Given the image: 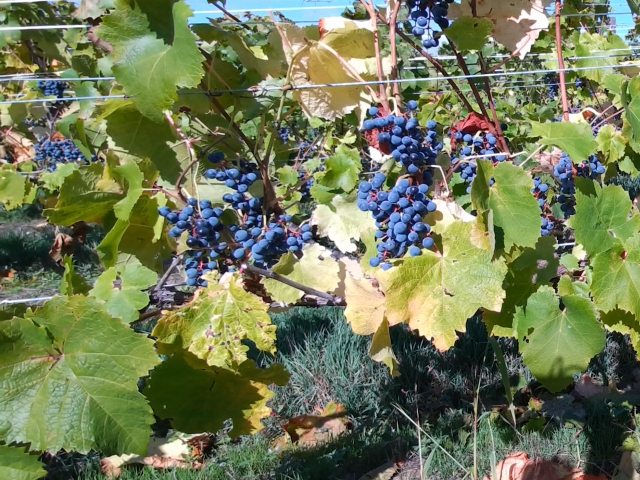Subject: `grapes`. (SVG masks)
I'll use <instances>...</instances> for the list:
<instances>
[{
	"label": "grapes",
	"mask_w": 640,
	"mask_h": 480,
	"mask_svg": "<svg viewBox=\"0 0 640 480\" xmlns=\"http://www.w3.org/2000/svg\"><path fill=\"white\" fill-rule=\"evenodd\" d=\"M468 161L476 163L475 159H468ZM470 162L458 164L455 173H459L460 178L467 180L468 182H473L476 175V166Z\"/></svg>",
	"instance_id": "grapes-9"
},
{
	"label": "grapes",
	"mask_w": 640,
	"mask_h": 480,
	"mask_svg": "<svg viewBox=\"0 0 640 480\" xmlns=\"http://www.w3.org/2000/svg\"><path fill=\"white\" fill-rule=\"evenodd\" d=\"M455 139L461 140L462 143H467L469 145L474 144L475 147L481 148L484 146V140L482 138H475L473 134H468L467 131L457 130L455 132Z\"/></svg>",
	"instance_id": "grapes-10"
},
{
	"label": "grapes",
	"mask_w": 640,
	"mask_h": 480,
	"mask_svg": "<svg viewBox=\"0 0 640 480\" xmlns=\"http://www.w3.org/2000/svg\"><path fill=\"white\" fill-rule=\"evenodd\" d=\"M198 206V200L196 198H188L186 205L181 208V213L172 212L170 207H160L158 214L165 218L170 223H175V227L169 230V236L171 238H178L183 234L185 229L191 227L189 217L194 215V208Z\"/></svg>",
	"instance_id": "grapes-7"
},
{
	"label": "grapes",
	"mask_w": 640,
	"mask_h": 480,
	"mask_svg": "<svg viewBox=\"0 0 640 480\" xmlns=\"http://www.w3.org/2000/svg\"><path fill=\"white\" fill-rule=\"evenodd\" d=\"M241 171L238 169L227 168L223 171H218L216 168H208L205 171V177L207 179H214L216 182H224L225 187H230L236 190V193H224L222 200L224 203H230V206L234 210H247V217L244 221L246 228H252L251 231L242 229L240 225H230L228 231L233 234V240L235 243H240L242 247L234 248L231 254L232 259H242L245 255V250L251 248V254L253 255V264L257 268H261L263 263L266 262L264 269L269 270L278 263L276 259L278 254L287 253L288 251L297 252L300 247L306 245V241H310L313 237L311 226L304 224L300 228L301 235H295L292 232L284 236L285 230L280 227L277 222H269L266 225L268 229L263 230L262 213H257L258 208L261 206L260 197H252L245 199V192L249 190V186H252L254 182L261 179L260 173H254L253 170L257 169L255 163H248L243 159L239 160Z\"/></svg>",
	"instance_id": "grapes-2"
},
{
	"label": "grapes",
	"mask_w": 640,
	"mask_h": 480,
	"mask_svg": "<svg viewBox=\"0 0 640 480\" xmlns=\"http://www.w3.org/2000/svg\"><path fill=\"white\" fill-rule=\"evenodd\" d=\"M590 168L592 169V173L589 174V168L587 166L576 167L577 175L582 177L583 179H597L598 175H604L607 172V169L600 161L597 160L596 155H591L589 157Z\"/></svg>",
	"instance_id": "grapes-8"
},
{
	"label": "grapes",
	"mask_w": 640,
	"mask_h": 480,
	"mask_svg": "<svg viewBox=\"0 0 640 480\" xmlns=\"http://www.w3.org/2000/svg\"><path fill=\"white\" fill-rule=\"evenodd\" d=\"M434 176V169L428 167L422 172L423 183L413 184L409 180H400L392 191H379L376 194V201H369L372 194L369 191L379 189L387 181L383 172H377L369 181H362L358 185L357 196L360 198L356 206L360 211L372 212V217L376 221L375 226L381 228L383 221L389 216L386 233L377 230L373 233L375 238H384V242L376 245L377 256L368 260L371 268L379 266L382 270L388 271L392 264L382 262L385 259V251L392 252L396 258H400L405 252L406 246H411L419 239L420 235H427L431 231L429 224L422 223V217L428 212L437 209V203L427 198L429 186L433 184L431 179ZM422 254L419 246H411L409 255L412 258Z\"/></svg>",
	"instance_id": "grapes-1"
},
{
	"label": "grapes",
	"mask_w": 640,
	"mask_h": 480,
	"mask_svg": "<svg viewBox=\"0 0 640 480\" xmlns=\"http://www.w3.org/2000/svg\"><path fill=\"white\" fill-rule=\"evenodd\" d=\"M439 33V30H432V38H427L423 41V48L430 49L432 47H437L439 45V39H441V35L435 37V34Z\"/></svg>",
	"instance_id": "grapes-12"
},
{
	"label": "grapes",
	"mask_w": 640,
	"mask_h": 480,
	"mask_svg": "<svg viewBox=\"0 0 640 480\" xmlns=\"http://www.w3.org/2000/svg\"><path fill=\"white\" fill-rule=\"evenodd\" d=\"M367 114L373 117L366 119L362 124V127L367 131L393 124L391 132L383 130L378 134L377 141L388 144L390 156L401 166L406 167L409 173H417L424 162L429 166H434L437 163L439 151L445 147V143L443 141L436 142L437 122L435 120H429L426 123L428 130L425 142L428 145L422 146L423 132L419 130L417 119L409 118L407 120L405 117L394 114H389L387 117H375L379 114V109L376 106L369 107Z\"/></svg>",
	"instance_id": "grapes-3"
},
{
	"label": "grapes",
	"mask_w": 640,
	"mask_h": 480,
	"mask_svg": "<svg viewBox=\"0 0 640 480\" xmlns=\"http://www.w3.org/2000/svg\"><path fill=\"white\" fill-rule=\"evenodd\" d=\"M410 31H411V33H412L413 35H415V36H417V37H420V36H422V35H424V34H425V30H424L423 28H418V27H416V26H412V27L410 28Z\"/></svg>",
	"instance_id": "grapes-15"
},
{
	"label": "grapes",
	"mask_w": 640,
	"mask_h": 480,
	"mask_svg": "<svg viewBox=\"0 0 640 480\" xmlns=\"http://www.w3.org/2000/svg\"><path fill=\"white\" fill-rule=\"evenodd\" d=\"M201 210V220L194 223V232L189 234L185 240L188 248L193 247H212L214 243L220 240V233L224 229V224L220 222V217L224 214L222 207H212L209 199H202L199 202ZM227 242H218L216 249H209L208 258L203 257V251H188V256L194 257L185 260L186 285L188 287H207V281L197 279L200 276H207V271L217 268V262L209 259H220V252L225 251Z\"/></svg>",
	"instance_id": "grapes-4"
},
{
	"label": "grapes",
	"mask_w": 640,
	"mask_h": 480,
	"mask_svg": "<svg viewBox=\"0 0 640 480\" xmlns=\"http://www.w3.org/2000/svg\"><path fill=\"white\" fill-rule=\"evenodd\" d=\"M454 0H420L419 8L421 10L413 11L410 14L412 21L416 22L419 27H425L427 25L428 13L426 9L431 10V14L434 16V22L439 25L442 30H445L449 21L442 16L447 15L448 4H453Z\"/></svg>",
	"instance_id": "grapes-6"
},
{
	"label": "grapes",
	"mask_w": 640,
	"mask_h": 480,
	"mask_svg": "<svg viewBox=\"0 0 640 480\" xmlns=\"http://www.w3.org/2000/svg\"><path fill=\"white\" fill-rule=\"evenodd\" d=\"M533 185L536 186L535 188L532 189L533 194H536L537 192L544 193L549 188L548 184L542 183V179L540 177L533 178Z\"/></svg>",
	"instance_id": "grapes-13"
},
{
	"label": "grapes",
	"mask_w": 640,
	"mask_h": 480,
	"mask_svg": "<svg viewBox=\"0 0 640 480\" xmlns=\"http://www.w3.org/2000/svg\"><path fill=\"white\" fill-rule=\"evenodd\" d=\"M541 230L540 233L542 236H548L551 234V230L554 228V224L552 222H548L547 218H543L541 220Z\"/></svg>",
	"instance_id": "grapes-14"
},
{
	"label": "grapes",
	"mask_w": 640,
	"mask_h": 480,
	"mask_svg": "<svg viewBox=\"0 0 640 480\" xmlns=\"http://www.w3.org/2000/svg\"><path fill=\"white\" fill-rule=\"evenodd\" d=\"M572 160L566 153H563L557 165L553 168V175L560 178L561 193L558 194V204L561 205V211L564 212V219L569 220L570 215L576 213L573 207L576 204L575 179L572 176Z\"/></svg>",
	"instance_id": "grapes-5"
},
{
	"label": "grapes",
	"mask_w": 640,
	"mask_h": 480,
	"mask_svg": "<svg viewBox=\"0 0 640 480\" xmlns=\"http://www.w3.org/2000/svg\"><path fill=\"white\" fill-rule=\"evenodd\" d=\"M485 140H486V141H488V142H487V146H488V148L480 149V150H479V155H480V156H484V155H491V154H494V153H495L494 148H495V145H496V143H497V140H496V139L493 137V135H492V134H490V133H486V134H485Z\"/></svg>",
	"instance_id": "grapes-11"
}]
</instances>
